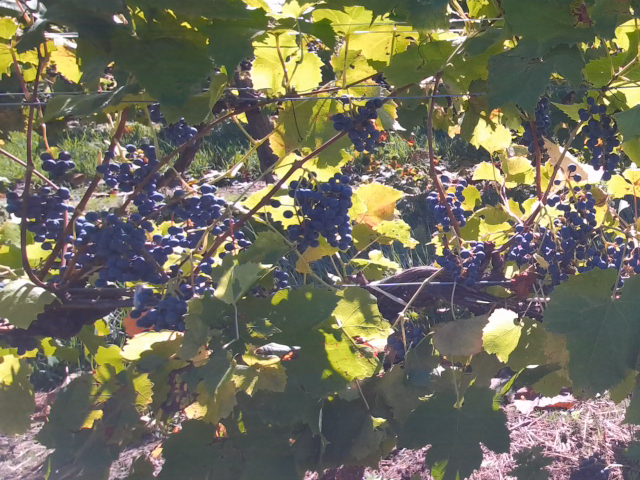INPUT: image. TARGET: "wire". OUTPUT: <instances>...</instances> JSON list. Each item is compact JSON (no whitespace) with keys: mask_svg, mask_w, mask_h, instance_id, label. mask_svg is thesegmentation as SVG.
<instances>
[{"mask_svg":"<svg viewBox=\"0 0 640 480\" xmlns=\"http://www.w3.org/2000/svg\"><path fill=\"white\" fill-rule=\"evenodd\" d=\"M85 93L84 89L74 91V90H40L37 92L38 96L43 95H72V96H80Z\"/></svg>","mask_w":640,"mask_h":480,"instance_id":"obj_4","label":"wire"},{"mask_svg":"<svg viewBox=\"0 0 640 480\" xmlns=\"http://www.w3.org/2000/svg\"><path fill=\"white\" fill-rule=\"evenodd\" d=\"M422 280H409V281H395V282H350L344 284L333 283L332 287L336 289H346L352 287H397V286H411L422 285Z\"/></svg>","mask_w":640,"mask_h":480,"instance_id":"obj_2","label":"wire"},{"mask_svg":"<svg viewBox=\"0 0 640 480\" xmlns=\"http://www.w3.org/2000/svg\"><path fill=\"white\" fill-rule=\"evenodd\" d=\"M599 90H600L599 86H594V87L563 86V87H549L546 89V92L547 93L565 92V91L596 92Z\"/></svg>","mask_w":640,"mask_h":480,"instance_id":"obj_3","label":"wire"},{"mask_svg":"<svg viewBox=\"0 0 640 480\" xmlns=\"http://www.w3.org/2000/svg\"><path fill=\"white\" fill-rule=\"evenodd\" d=\"M485 92H472V93H462V94H452V93H430V94H422V95H414V96H395V95H369V96H351V101H372V100H392V101H416V100H425L432 98H446V99H464V98H475V97H485Z\"/></svg>","mask_w":640,"mask_h":480,"instance_id":"obj_1","label":"wire"}]
</instances>
